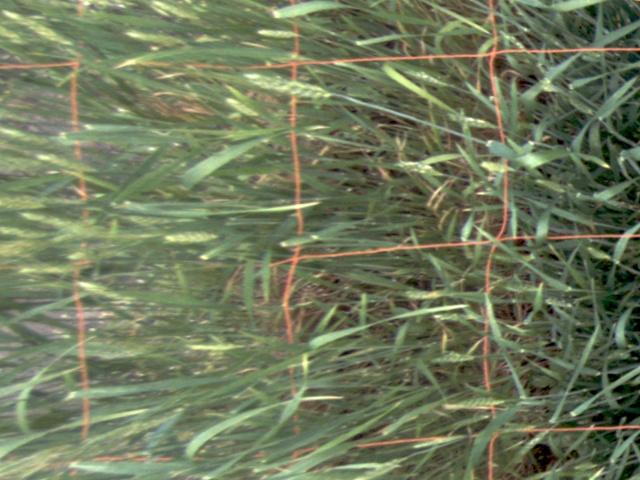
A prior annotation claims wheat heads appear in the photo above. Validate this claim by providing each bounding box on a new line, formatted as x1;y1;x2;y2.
402;291;438;302
408;67;444;87
586;247;610;262
1;193;45;209
7;12;66;47
185;344;242;354
154;0;203;22
7;444;74;472
3;128;45;150
27;210;104;236
164;234;218;244
463;115;491;131
223;98;257;120
397;157;433;175
128;30;184;46
481;162;511;175
545;297;569;310
508;280;542;297
443;397;502;414
40;152;94;171
81;282;123;306
254;29;302;40
433;353;472;361
2;226;27;240
245;75;330;101
111;412;179;443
